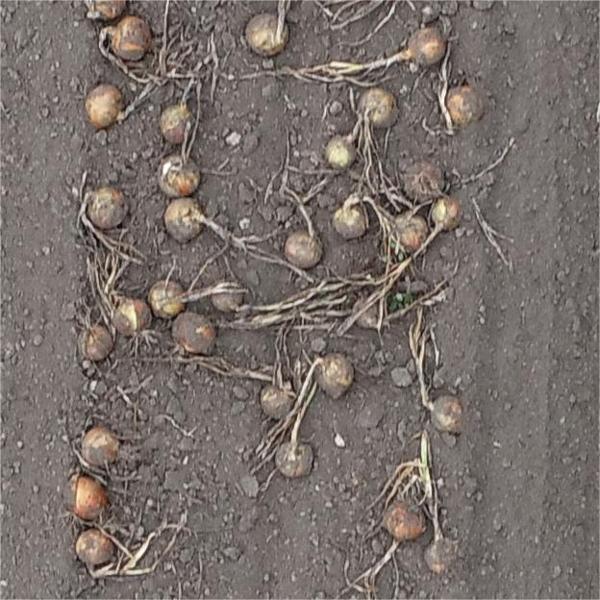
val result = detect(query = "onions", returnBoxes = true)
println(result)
[163,198,201,240]
[149,279,184,317]
[446,86,485,128]
[157,102,191,140]
[351,297,379,327]
[258,384,292,417]
[315,354,353,394]
[331,199,367,236]
[159,158,197,195]
[111,296,150,333]
[83,0,124,19]
[383,505,422,541]
[355,88,397,126]
[429,396,462,433]
[75,528,111,564]
[390,215,425,255]
[244,14,286,55]
[79,425,118,465]
[110,16,149,59]
[322,136,354,167]
[213,280,242,312]
[425,538,447,571]
[407,26,445,64]
[84,84,123,127]
[283,230,321,268]
[79,324,111,360]
[173,312,215,355]
[428,196,458,226]
[276,439,312,478]
[402,160,444,198]
[84,185,125,227]
[71,476,106,517]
